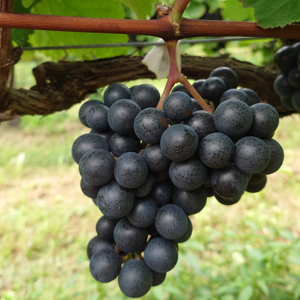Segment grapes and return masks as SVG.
<instances>
[{"label": "grapes", "mask_w": 300, "mask_h": 300, "mask_svg": "<svg viewBox=\"0 0 300 300\" xmlns=\"http://www.w3.org/2000/svg\"><path fill=\"white\" fill-rule=\"evenodd\" d=\"M237 86L236 72L220 66L176 85L163 110L149 83L111 84L103 101L81 106L91 132L75 140L72 155L82 192L103 213L86 247L96 281L117 277L125 295H145L176 266L177 243L191 237L190 215L207 197L235 204L282 166V146L272 139L277 110Z\"/></svg>", "instance_id": "grapes-1"}]
</instances>
